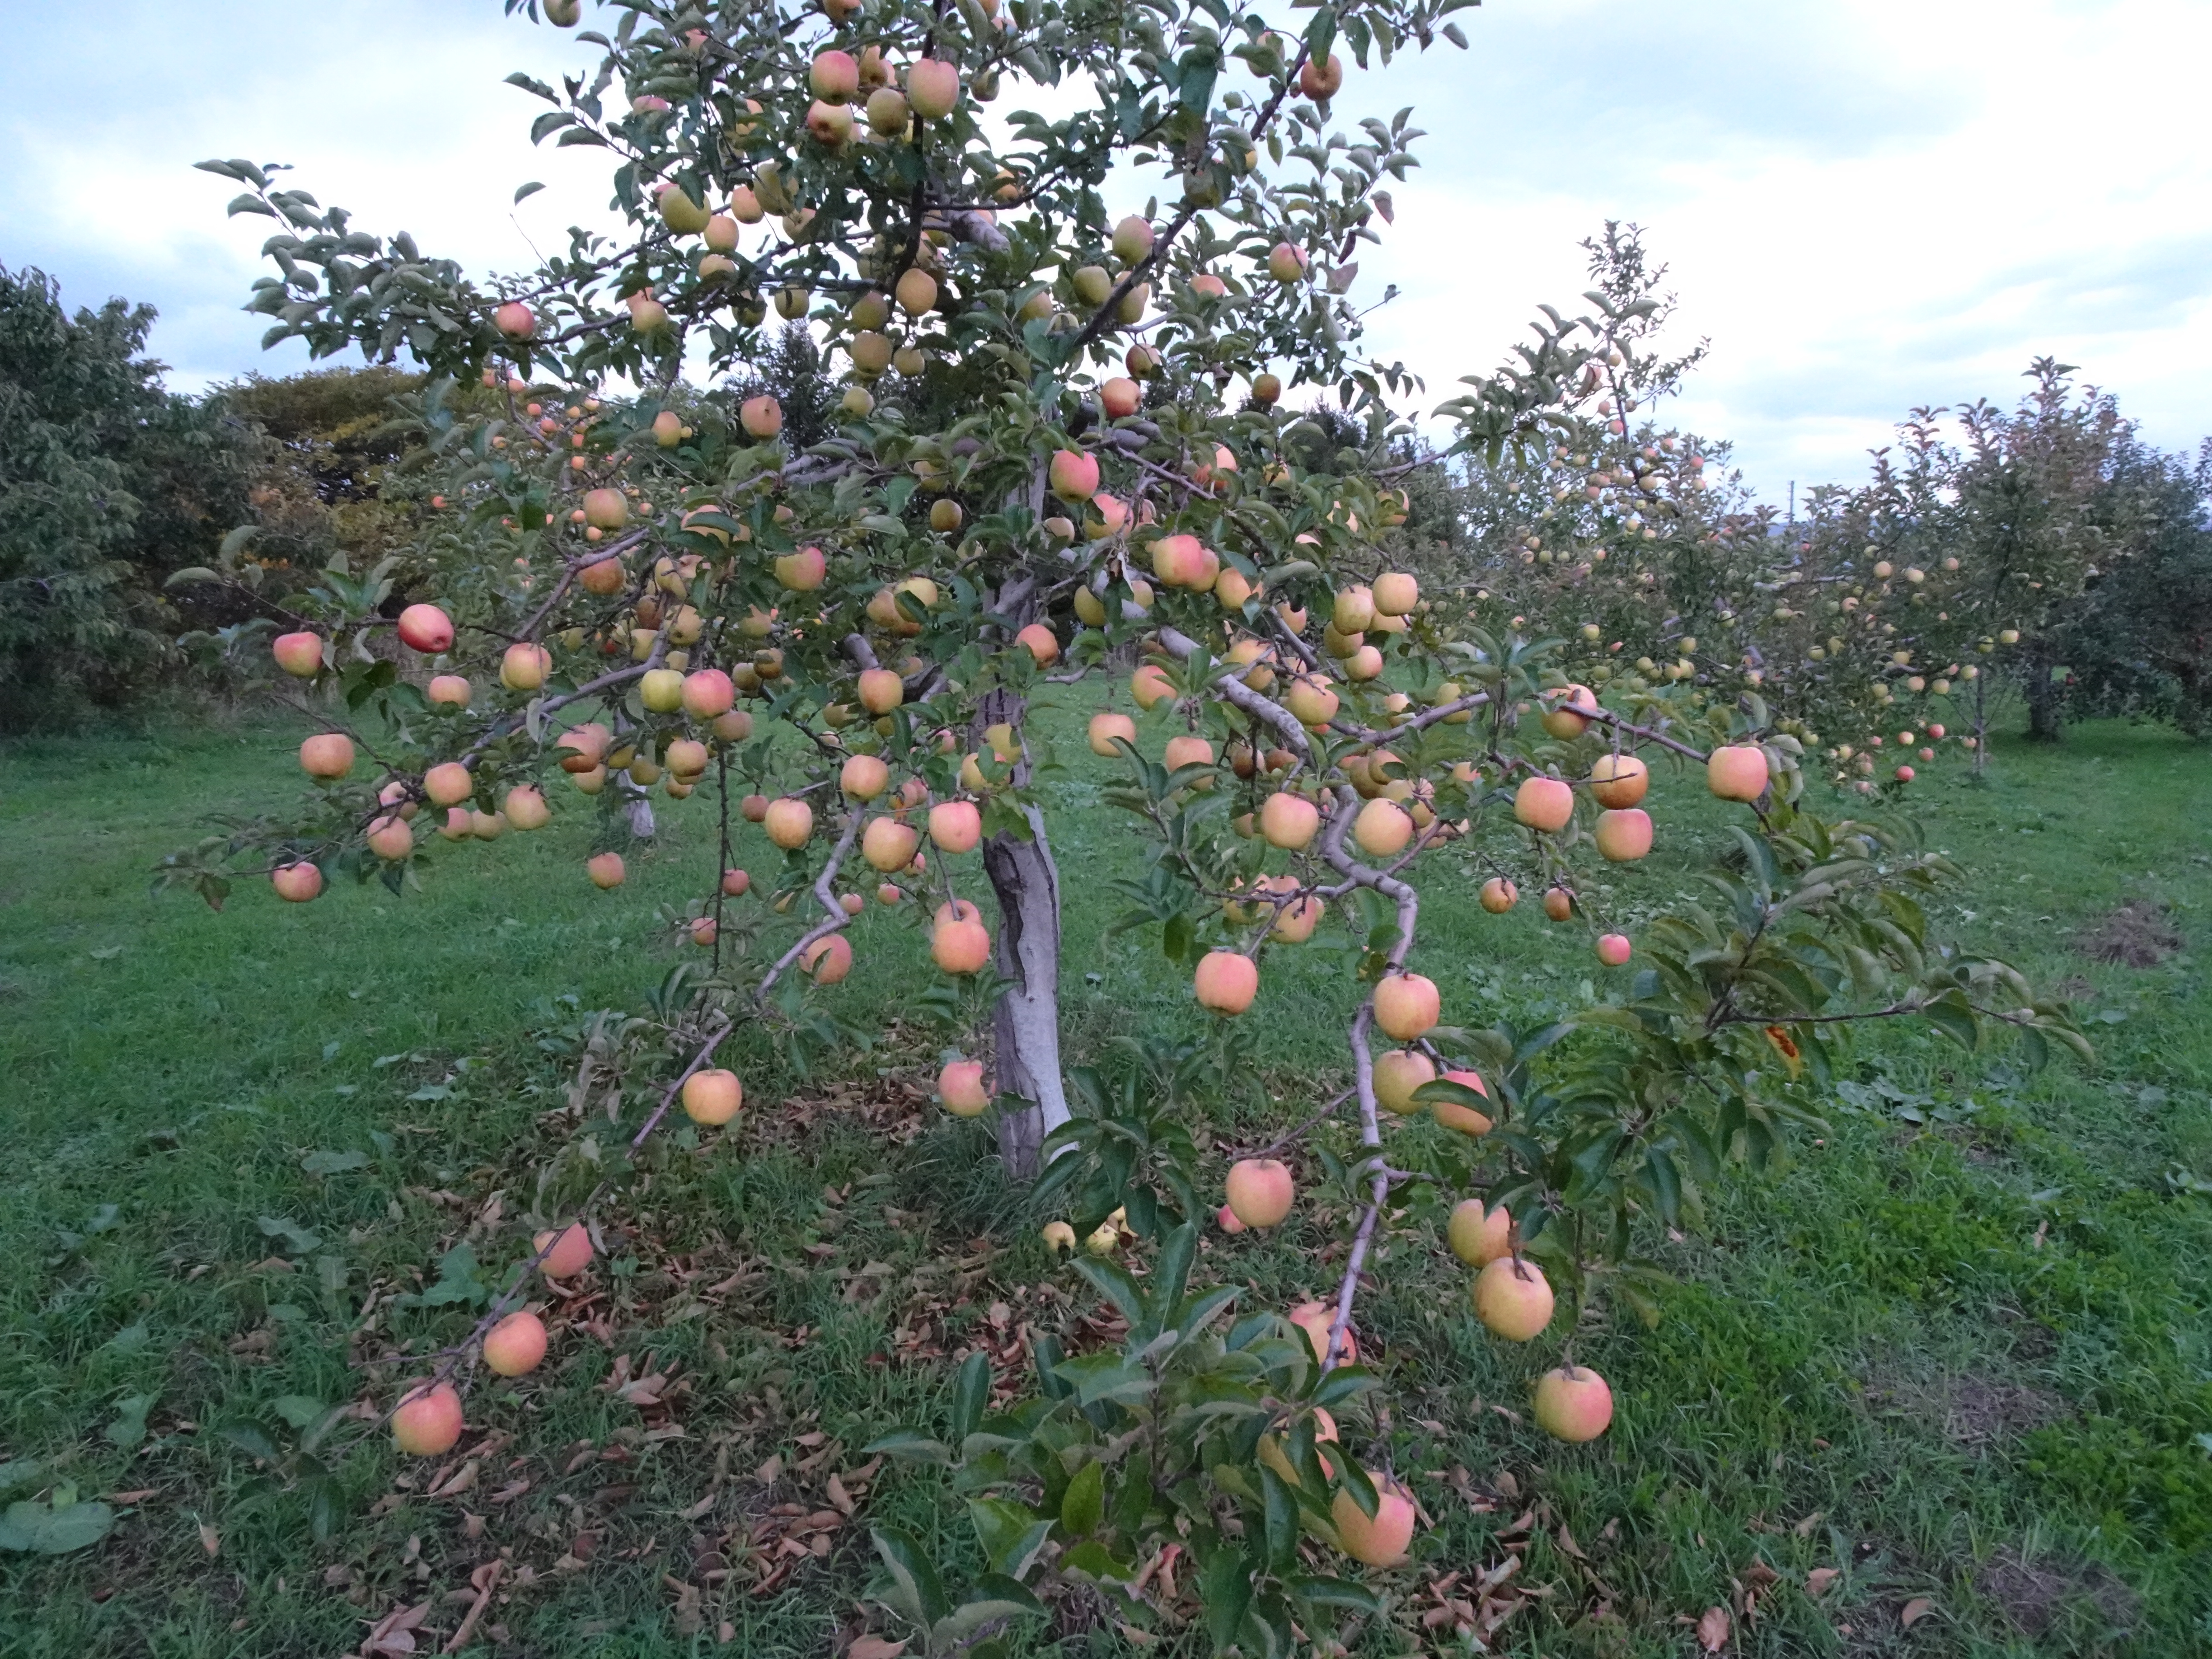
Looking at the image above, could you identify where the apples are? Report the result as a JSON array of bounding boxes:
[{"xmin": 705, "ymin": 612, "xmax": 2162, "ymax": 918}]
[
  {"xmin": 867, "ymin": 88, "xmax": 908, "ymax": 137},
  {"xmin": 723, "ymin": 869, "xmax": 749, "ymax": 896},
  {"xmin": 1251, "ymin": 374, "xmax": 1280, "ymax": 405},
  {"xmin": 559, "ymin": 628, "xmax": 584, "ymax": 652},
  {"xmin": 622, "ymin": 569, "xmax": 636, "ymax": 592},
  {"xmin": 1471, "ymin": 1257, "xmax": 1553, "ymax": 1341},
  {"xmin": 1126, "ymin": 343, "xmax": 1160, "ymax": 380},
  {"xmin": 391, "ymin": 1383, "xmax": 462, "ymax": 1456},
  {"xmin": 483, "ymin": 1312, "xmax": 548, "ymax": 1377},
  {"xmin": 588, "ymin": 852, "xmax": 624, "ymax": 890},
  {"xmin": 654, "ymin": 556, "xmax": 675, "ymax": 590},
  {"xmin": 1541, "ymin": 684, "xmax": 1597, "ymax": 741},
  {"xmin": 1707, "ymin": 746, "xmax": 1768, "ymax": 803},
  {"xmin": 932, "ymin": 729, "xmax": 956, "ymax": 755},
  {"xmin": 630, "ymin": 628, "xmax": 658, "ymax": 662},
  {"xmin": 533, "ymin": 1222, "xmax": 594, "ymax": 1278},
  {"xmin": 1326, "ymin": 500, "xmax": 1358, "ymax": 532},
  {"xmin": 775, "ymin": 545, "xmax": 825, "ymax": 592},
  {"xmin": 732, "ymin": 663, "xmax": 762, "ymax": 691},
  {"xmin": 1349, "ymin": 757, "xmax": 1385, "ymax": 800},
  {"xmin": 1112, "ymin": 217, "xmax": 1153, "ymax": 267},
  {"xmin": 1382, "ymin": 777, "xmax": 1435, "ymax": 829},
  {"xmin": 504, "ymin": 643, "xmax": 552, "ymax": 690},
  {"xmin": 889, "ymin": 783, "xmax": 917, "ymax": 811},
  {"xmin": 1260, "ymin": 793, "xmax": 1319, "ymax": 851},
  {"xmin": 368, "ymin": 816, "xmax": 413, "ymax": 860},
  {"xmin": 858, "ymin": 58, "xmax": 888, "ymax": 87},
  {"xmin": 1289, "ymin": 1303, "xmax": 1356, "ymax": 1368},
  {"xmin": 738, "ymin": 604, "xmax": 771, "ymax": 636},
  {"xmin": 959, "ymin": 752, "xmax": 1010, "ymax": 797},
  {"xmin": 1101, "ymin": 377, "xmax": 1142, "ymax": 418},
  {"xmin": 273, "ymin": 861, "xmax": 322, "ymax": 903},
  {"xmin": 1112, "ymin": 287, "xmax": 1145, "ymax": 324},
  {"xmin": 930, "ymin": 248, "xmax": 948, "ymax": 270},
  {"xmin": 1153, "ymin": 534, "xmax": 1201, "ymax": 587},
  {"xmin": 921, "ymin": 210, "xmax": 958, "ymax": 248},
  {"xmin": 1373, "ymin": 1050, "xmax": 1436, "ymax": 1115},
  {"xmin": 874, "ymin": 234, "xmax": 899, "ymax": 254},
  {"xmin": 1225, "ymin": 1159, "xmax": 1294, "ymax": 1227},
  {"xmin": 1309, "ymin": 787, "xmax": 1331, "ymax": 803},
  {"xmin": 682, "ymin": 669, "xmax": 734, "ymax": 721},
  {"xmin": 663, "ymin": 605, "xmax": 702, "ymax": 646},
  {"xmin": 632, "ymin": 301, "xmax": 667, "ymax": 335},
  {"xmin": 1024, "ymin": 292, "xmax": 1053, "ymax": 321},
  {"xmin": 957, "ymin": 540, "xmax": 983, "ymax": 563},
  {"xmin": 505, "ymin": 784, "xmax": 551, "ymax": 831},
  {"xmin": 429, "ymin": 676, "xmax": 471, "ymax": 709},
  {"xmin": 380, "ymin": 781, "xmax": 418, "ymax": 822},
  {"xmin": 1264, "ymin": 748, "xmax": 1298, "ymax": 774},
  {"xmin": 931, "ymin": 921, "xmax": 990, "ymax": 975},
  {"xmin": 1131, "ymin": 665, "xmax": 1177, "ymax": 712},
  {"xmin": 1375, "ymin": 489, "xmax": 1409, "ymax": 527},
  {"xmin": 984, "ymin": 722, "xmax": 1024, "ymax": 765},
  {"xmin": 1448, "ymin": 1198, "xmax": 1513, "ymax": 1268},
  {"xmin": 1419, "ymin": 818, "xmax": 1447, "ymax": 849},
  {"xmin": 1313, "ymin": 897, "xmax": 1325, "ymax": 921},
  {"xmin": 764, "ymin": 798, "xmax": 813, "ymax": 849},
  {"xmin": 1082, "ymin": 494, "xmax": 1134, "ymax": 539},
  {"xmin": 1187, "ymin": 548, "xmax": 1219, "ymax": 593},
  {"xmin": 1323, "ymin": 621, "xmax": 1364, "ymax": 660},
  {"xmin": 690, "ymin": 918, "xmax": 717, "ymax": 946},
  {"xmin": 773, "ymin": 505, "xmax": 792, "ymax": 524},
  {"xmin": 1089, "ymin": 713, "xmax": 1135, "ymax": 757},
  {"xmin": 1384, "ymin": 693, "xmax": 1411, "ymax": 713},
  {"xmin": 1535, "ymin": 1366, "xmax": 1613, "ymax": 1443},
  {"xmin": 1256, "ymin": 1406, "xmax": 1338, "ymax": 1486},
  {"xmin": 823, "ymin": 702, "xmax": 852, "ymax": 729},
  {"xmin": 880, "ymin": 59, "xmax": 897, "ymax": 86},
  {"xmin": 1332, "ymin": 593, "xmax": 1374, "ymax": 636},
  {"xmin": 991, "ymin": 17, "xmax": 1018, "ymax": 30},
  {"xmin": 626, "ymin": 287, "xmax": 654, "ymax": 312},
  {"xmin": 667, "ymin": 740, "xmax": 708, "ymax": 777},
  {"xmin": 1301, "ymin": 54, "xmax": 1342, "ymax": 101},
  {"xmin": 595, "ymin": 632, "xmax": 615, "ymax": 654},
  {"xmin": 1263, "ymin": 460, "xmax": 1290, "ymax": 485},
  {"xmin": 1480, "ymin": 877, "xmax": 1517, "ymax": 914},
  {"xmin": 398, "ymin": 603, "xmax": 454, "ymax": 653},
  {"xmin": 1113, "ymin": 271, "xmax": 1150, "ymax": 303},
  {"xmin": 574, "ymin": 763, "xmax": 606, "ymax": 795},
  {"xmin": 973, "ymin": 210, "xmax": 994, "ymax": 226},
  {"xmin": 867, "ymin": 591, "xmax": 900, "ymax": 627},
  {"xmin": 698, "ymin": 254, "xmax": 735, "ymax": 280},
  {"xmin": 840, "ymin": 754, "xmax": 888, "ymax": 802},
  {"xmin": 846, "ymin": 122, "xmax": 863, "ymax": 144},
  {"xmin": 1284, "ymin": 534, "xmax": 1322, "ymax": 563},
  {"xmin": 853, "ymin": 360, "xmax": 887, "ymax": 378},
  {"xmin": 578, "ymin": 556, "xmax": 625, "ymax": 595},
  {"xmin": 883, "ymin": 583, "xmax": 896, "ymax": 594},
  {"xmin": 798, "ymin": 933, "xmax": 851, "ymax": 984},
  {"xmin": 893, "ymin": 346, "xmax": 925, "ymax": 378},
  {"xmin": 499, "ymin": 662, "xmax": 519, "ymax": 691},
  {"xmin": 1340, "ymin": 584, "xmax": 1378, "ymax": 615},
  {"xmin": 274, "ymin": 631, "xmax": 322, "ymax": 678},
  {"xmin": 1194, "ymin": 951, "xmax": 1258, "ymax": 1017},
  {"xmin": 976, "ymin": 0, "xmax": 1000, "ymax": 20},
  {"xmin": 1183, "ymin": 158, "xmax": 1221, "ymax": 209},
  {"xmin": 628, "ymin": 756, "xmax": 661, "ymax": 786},
  {"xmin": 904, "ymin": 656, "xmax": 923, "ymax": 676},
  {"xmin": 1338, "ymin": 755, "xmax": 1361, "ymax": 769},
  {"xmin": 753, "ymin": 162, "xmax": 799, "ymax": 216},
  {"xmin": 899, "ymin": 119, "xmax": 932, "ymax": 143},
  {"xmin": 862, "ymin": 816, "xmax": 917, "ymax": 873},
  {"xmin": 783, "ymin": 207, "xmax": 816, "ymax": 240},
  {"xmin": 1278, "ymin": 602, "xmax": 1306, "ymax": 635},
  {"xmin": 1288, "ymin": 674, "xmax": 1339, "ymax": 726},
  {"xmin": 732, "ymin": 515, "xmax": 751, "ymax": 542},
  {"xmin": 1219, "ymin": 651, "xmax": 1271, "ymax": 691},
  {"xmin": 934, "ymin": 899, "xmax": 981, "ymax": 932},
  {"xmin": 850, "ymin": 333, "xmax": 892, "ymax": 374},
  {"xmin": 1142, "ymin": 639, "xmax": 1169, "ymax": 654},
  {"xmin": 583, "ymin": 488, "xmax": 628, "ymax": 531},
  {"xmin": 839, "ymin": 893, "xmax": 863, "ymax": 916},
  {"xmin": 858, "ymin": 669, "xmax": 902, "ymax": 715},
  {"xmin": 753, "ymin": 647, "xmax": 783, "ymax": 680},
  {"xmin": 1131, "ymin": 502, "xmax": 1152, "ymax": 523},
  {"xmin": 851, "ymin": 90, "xmax": 870, "ymax": 107},
  {"xmin": 1331, "ymin": 1471, "xmax": 1414, "ymax": 1566},
  {"xmin": 682, "ymin": 1069, "xmax": 741, "ymax": 1126},
  {"xmin": 1268, "ymin": 895, "xmax": 1316, "ymax": 943},
  {"xmin": 703, "ymin": 215, "xmax": 739, "ymax": 254},
  {"xmin": 894, "ymin": 577, "xmax": 938, "ymax": 622},
  {"xmin": 650, "ymin": 411, "xmax": 682, "ymax": 447},
  {"xmin": 1222, "ymin": 873, "xmax": 1274, "ymax": 924},
  {"xmin": 807, "ymin": 99, "xmax": 854, "ymax": 146},
  {"xmin": 877, "ymin": 883, "xmax": 900, "ymax": 905},
  {"xmin": 637, "ymin": 595, "xmax": 665, "ymax": 630},
  {"xmin": 740, "ymin": 795, "xmax": 769, "ymax": 823},
  {"xmin": 607, "ymin": 736, "xmax": 638, "ymax": 769},
  {"xmin": 952, "ymin": 437, "xmax": 982, "ymax": 460},
  {"xmin": 896, "ymin": 268, "xmax": 937, "ymax": 316},
  {"xmin": 1435, "ymin": 683, "xmax": 1472, "ymax": 725},
  {"xmin": 842, "ymin": 386, "xmax": 874, "ymax": 418},
  {"xmin": 685, "ymin": 29, "xmax": 708, "ymax": 55},
  {"xmin": 1074, "ymin": 585, "xmax": 1107, "ymax": 627},
  {"xmin": 1372, "ymin": 572, "xmax": 1418, "ymax": 616},
  {"xmin": 1188, "ymin": 775, "xmax": 1214, "ymax": 791},
  {"xmin": 1373, "ymin": 973, "xmax": 1440, "ymax": 1041},
  {"xmin": 1270, "ymin": 875, "xmax": 1300, "ymax": 891},
  {"xmin": 1515, "ymin": 777, "xmax": 1574, "ymax": 833},
  {"xmin": 867, "ymin": 129, "xmax": 895, "ymax": 144},
  {"xmin": 1014, "ymin": 624, "xmax": 1058, "ymax": 670},
  {"xmin": 1043, "ymin": 517, "xmax": 1074, "ymax": 542},
  {"xmin": 1344, "ymin": 646, "xmax": 1383, "ymax": 683},
  {"xmin": 1269, "ymin": 242, "xmax": 1308, "ymax": 285},
  {"xmin": 902, "ymin": 852, "xmax": 925, "ymax": 877},
  {"xmin": 713, "ymin": 711, "xmax": 752, "ymax": 743},
  {"xmin": 496, "ymin": 302, "xmax": 535, "ymax": 343},
  {"xmin": 1223, "ymin": 141, "xmax": 1259, "ymax": 170},
  {"xmin": 909, "ymin": 781, "xmax": 928, "ymax": 805},
  {"xmin": 654, "ymin": 183, "xmax": 677, "ymax": 201},
  {"xmin": 740, "ymin": 396, "xmax": 782, "ymax": 441},
  {"xmin": 913, "ymin": 461, "xmax": 946, "ymax": 491},
  {"xmin": 704, "ymin": 742, "xmax": 718, "ymax": 759},
  {"xmin": 1072, "ymin": 266, "xmax": 1112, "ymax": 308},
  {"xmin": 1053, "ymin": 313, "xmax": 1079, "ymax": 334},
  {"xmin": 300, "ymin": 734, "xmax": 354, "ymax": 779},
  {"xmin": 992, "ymin": 169, "xmax": 1024, "ymax": 208},
  {"xmin": 1590, "ymin": 754, "xmax": 1649, "ymax": 810},
  {"xmin": 1217, "ymin": 568, "xmax": 1253, "ymax": 612},
  {"xmin": 1165, "ymin": 736, "xmax": 1212, "ymax": 773},
  {"xmin": 618, "ymin": 615, "xmax": 639, "ymax": 635},
  {"xmin": 1229, "ymin": 639, "xmax": 1276, "ymax": 666},
  {"xmin": 1049, "ymin": 449, "xmax": 1099, "ymax": 504},
  {"xmin": 1430, "ymin": 1070, "xmax": 1497, "ymax": 1136},
  {"xmin": 906, "ymin": 58, "xmax": 960, "ymax": 119},
  {"xmin": 1193, "ymin": 442, "xmax": 1237, "ymax": 492},
  {"xmin": 970, "ymin": 69, "xmax": 1000, "ymax": 101},
  {"xmin": 1123, "ymin": 522, "xmax": 1161, "ymax": 552},
  {"xmin": 818, "ymin": 731, "xmax": 839, "ymax": 746},
  {"xmin": 732, "ymin": 290, "xmax": 766, "ymax": 327},
  {"xmin": 1447, "ymin": 818, "xmax": 1469, "ymax": 834},
  {"xmin": 1544, "ymin": 887, "xmax": 1574, "ymax": 922},
  {"xmin": 736, "ymin": 98, "xmax": 763, "ymax": 135},
  {"xmin": 1313, "ymin": 724, "xmax": 1330, "ymax": 736},
  {"xmin": 666, "ymin": 773, "xmax": 693, "ymax": 799},
  {"xmin": 1231, "ymin": 746, "xmax": 1265, "ymax": 780},
  {"xmin": 810, "ymin": 50, "xmax": 859, "ymax": 106},
  {"xmin": 931, "ymin": 499, "xmax": 962, "ymax": 533},
  {"xmin": 731, "ymin": 186, "xmax": 764, "ymax": 224},
  {"xmin": 1453, "ymin": 762, "xmax": 1480, "ymax": 782},
  {"xmin": 472, "ymin": 809, "xmax": 505, "ymax": 841},
  {"xmin": 680, "ymin": 505, "xmax": 729, "ymax": 548},
  {"xmin": 851, "ymin": 508, "xmax": 869, "ymax": 538},
  {"xmin": 1368, "ymin": 750, "xmax": 1402, "ymax": 785},
  {"xmin": 660, "ymin": 184, "xmax": 711, "ymax": 235},
  {"xmin": 646, "ymin": 579, "xmax": 662, "ymax": 595},
  {"xmin": 774, "ymin": 285, "xmax": 809, "ymax": 320},
  {"xmin": 928, "ymin": 800, "xmax": 981, "ymax": 854},
  {"xmin": 438, "ymin": 807, "xmax": 473, "ymax": 843},
  {"xmin": 633, "ymin": 95, "xmax": 669, "ymax": 116},
  {"xmin": 640, "ymin": 669, "xmax": 685, "ymax": 714},
  {"xmin": 892, "ymin": 617, "xmax": 921, "ymax": 639},
  {"xmin": 1250, "ymin": 581, "xmax": 1264, "ymax": 600},
  {"xmin": 584, "ymin": 723, "xmax": 610, "ymax": 758},
  {"xmin": 853, "ymin": 44, "xmax": 881, "ymax": 66},
  {"xmin": 1355, "ymin": 798, "xmax": 1412, "ymax": 857},
  {"xmin": 1281, "ymin": 657, "xmax": 1307, "ymax": 681},
  {"xmin": 425, "ymin": 762, "xmax": 472, "ymax": 807},
  {"xmin": 1247, "ymin": 31, "xmax": 1285, "ymax": 77},
  {"xmin": 895, "ymin": 231, "xmax": 933, "ymax": 268},
  {"xmin": 1323, "ymin": 804, "xmax": 1330, "ymax": 813},
  {"xmin": 1233, "ymin": 813, "xmax": 1255, "ymax": 839},
  {"xmin": 857, "ymin": 247, "xmax": 881, "ymax": 280},
  {"xmin": 938, "ymin": 1060, "xmax": 995, "ymax": 1117},
  {"xmin": 1371, "ymin": 610, "xmax": 1409, "ymax": 634},
  {"xmin": 1190, "ymin": 274, "xmax": 1224, "ymax": 298},
  {"xmin": 672, "ymin": 772, "xmax": 701, "ymax": 785},
  {"xmin": 851, "ymin": 291, "xmax": 888, "ymax": 331},
  {"xmin": 1131, "ymin": 580, "xmax": 1154, "ymax": 609},
  {"xmin": 769, "ymin": 890, "xmax": 795, "ymax": 912},
  {"xmin": 1596, "ymin": 933, "xmax": 1631, "ymax": 967},
  {"xmin": 556, "ymin": 726, "xmax": 600, "ymax": 773},
  {"xmin": 664, "ymin": 651, "xmax": 689, "ymax": 674},
  {"xmin": 1594, "ymin": 808, "xmax": 1652, "ymax": 863},
  {"xmin": 543, "ymin": 0, "xmax": 581, "ymax": 27},
  {"xmin": 670, "ymin": 555, "xmax": 711, "ymax": 598},
  {"xmin": 823, "ymin": 0, "xmax": 862, "ymax": 23}
]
